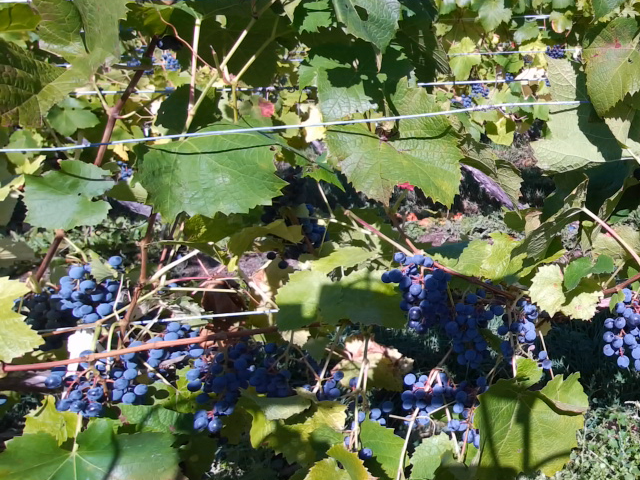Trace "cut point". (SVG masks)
<instances>
[{
  "label": "cut point",
  "instance_id": "1",
  "mask_svg": "<svg viewBox=\"0 0 640 480\" xmlns=\"http://www.w3.org/2000/svg\"><path fill=\"white\" fill-rule=\"evenodd\" d=\"M124 324L125 321L123 319H116L111 323L110 327L107 329L106 335V342L108 344H111L113 342L114 332L116 331L117 327L123 326Z\"/></svg>",
  "mask_w": 640,
  "mask_h": 480
},
{
  "label": "cut point",
  "instance_id": "2",
  "mask_svg": "<svg viewBox=\"0 0 640 480\" xmlns=\"http://www.w3.org/2000/svg\"><path fill=\"white\" fill-rule=\"evenodd\" d=\"M126 326L129 329L141 331L143 334H146V335H149L151 333V329L149 327H145L144 325H131V320H128L126 322Z\"/></svg>",
  "mask_w": 640,
  "mask_h": 480
}]
</instances>
